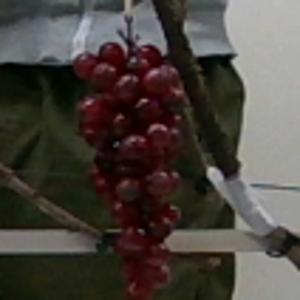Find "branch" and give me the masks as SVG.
<instances>
[{
  "label": "branch",
  "instance_id": "170604dd",
  "mask_svg": "<svg viewBox=\"0 0 300 300\" xmlns=\"http://www.w3.org/2000/svg\"><path fill=\"white\" fill-rule=\"evenodd\" d=\"M171 268H212L221 264L219 257H213L208 259H180L170 258L167 262Z\"/></svg>",
  "mask_w": 300,
  "mask_h": 300
},
{
  "label": "branch",
  "instance_id": "325d2c04",
  "mask_svg": "<svg viewBox=\"0 0 300 300\" xmlns=\"http://www.w3.org/2000/svg\"><path fill=\"white\" fill-rule=\"evenodd\" d=\"M0 180L15 188L23 197L31 202L44 215L50 217L62 226L69 228L79 235L95 241L98 254L108 246L116 245L122 236L104 234L79 221L73 214L64 210L57 203L49 200L41 192L30 186L24 180L14 174L9 167L0 161Z\"/></svg>",
  "mask_w": 300,
  "mask_h": 300
},
{
  "label": "branch",
  "instance_id": "30e6481e",
  "mask_svg": "<svg viewBox=\"0 0 300 300\" xmlns=\"http://www.w3.org/2000/svg\"><path fill=\"white\" fill-rule=\"evenodd\" d=\"M151 7L168 41L178 75L190 101L194 138L206 178L241 216L263 249L278 261L291 262L300 272V232L267 214L246 181L239 151L222 130L210 98L206 72L186 29L183 0H151Z\"/></svg>",
  "mask_w": 300,
  "mask_h": 300
}]
</instances>
